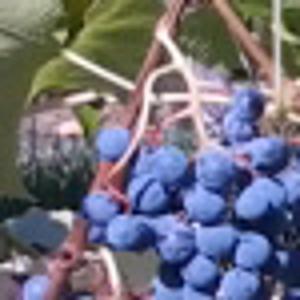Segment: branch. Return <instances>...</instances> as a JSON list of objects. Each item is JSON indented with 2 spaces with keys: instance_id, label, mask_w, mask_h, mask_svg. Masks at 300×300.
I'll use <instances>...</instances> for the list:
<instances>
[{
  "instance_id": "branch-4",
  "label": "branch",
  "mask_w": 300,
  "mask_h": 300,
  "mask_svg": "<svg viewBox=\"0 0 300 300\" xmlns=\"http://www.w3.org/2000/svg\"><path fill=\"white\" fill-rule=\"evenodd\" d=\"M119 164H110L108 160H103L101 166L96 174L95 179L92 183V189L94 191H99L111 182L113 173Z\"/></svg>"
},
{
  "instance_id": "branch-3",
  "label": "branch",
  "mask_w": 300,
  "mask_h": 300,
  "mask_svg": "<svg viewBox=\"0 0 300 300\" xmlns=\"http://www.w3.org/2000/svg\"><path fill=\"white\" fill-rule=\"evenodd\" d=\"M88 233L89 224L84 219L76 220L62 242L59 254L49 259L46 279L50 291L45 294L46 300H54L66 288L71 272L86 252Z\"/></svg>"
},
{
  "instance_id": "branch-1",
  "label": "branch",
  "mask_w": 300,
  "mask_h": 300,
  "mask_svg": "<svg viewBox=\"0 0 300 300\" xmlns=\"http://www.w3.org/2000/svg\"><path fill=\"white\" fill-rule=\"evenodd\" d=\"M189 0H172L162 15L159 27H157L149 41V50L145 54L143 68L138 76L133 94L125 112L121 126L132 130L141 109V96L146 77L151 74L153 68L158 67L163 61L166 50L170 44L177 40L179 33V21L182 20Z\"/></svg>"
},
{
  "instance_id": "branch-2",
  "label": "branch",
  "mask_w": 300,
  "mask_h": 300,
  "mask_svg": "<svg viewBox=\"0 0 300 300\" xmlns=\"http://www.w3.org/2000/svg\"><path fill=\"white\" fill-rule=\"evenodd\" d=\"M212 4L219 16L231 27L234 36L244 49L256 60L272 81L275 87L293 104L300 109V91L290 83L283 72L275 64L266 50L254 39L238 13L226 0H212Z\"/></svg>"
}]
</instances>
